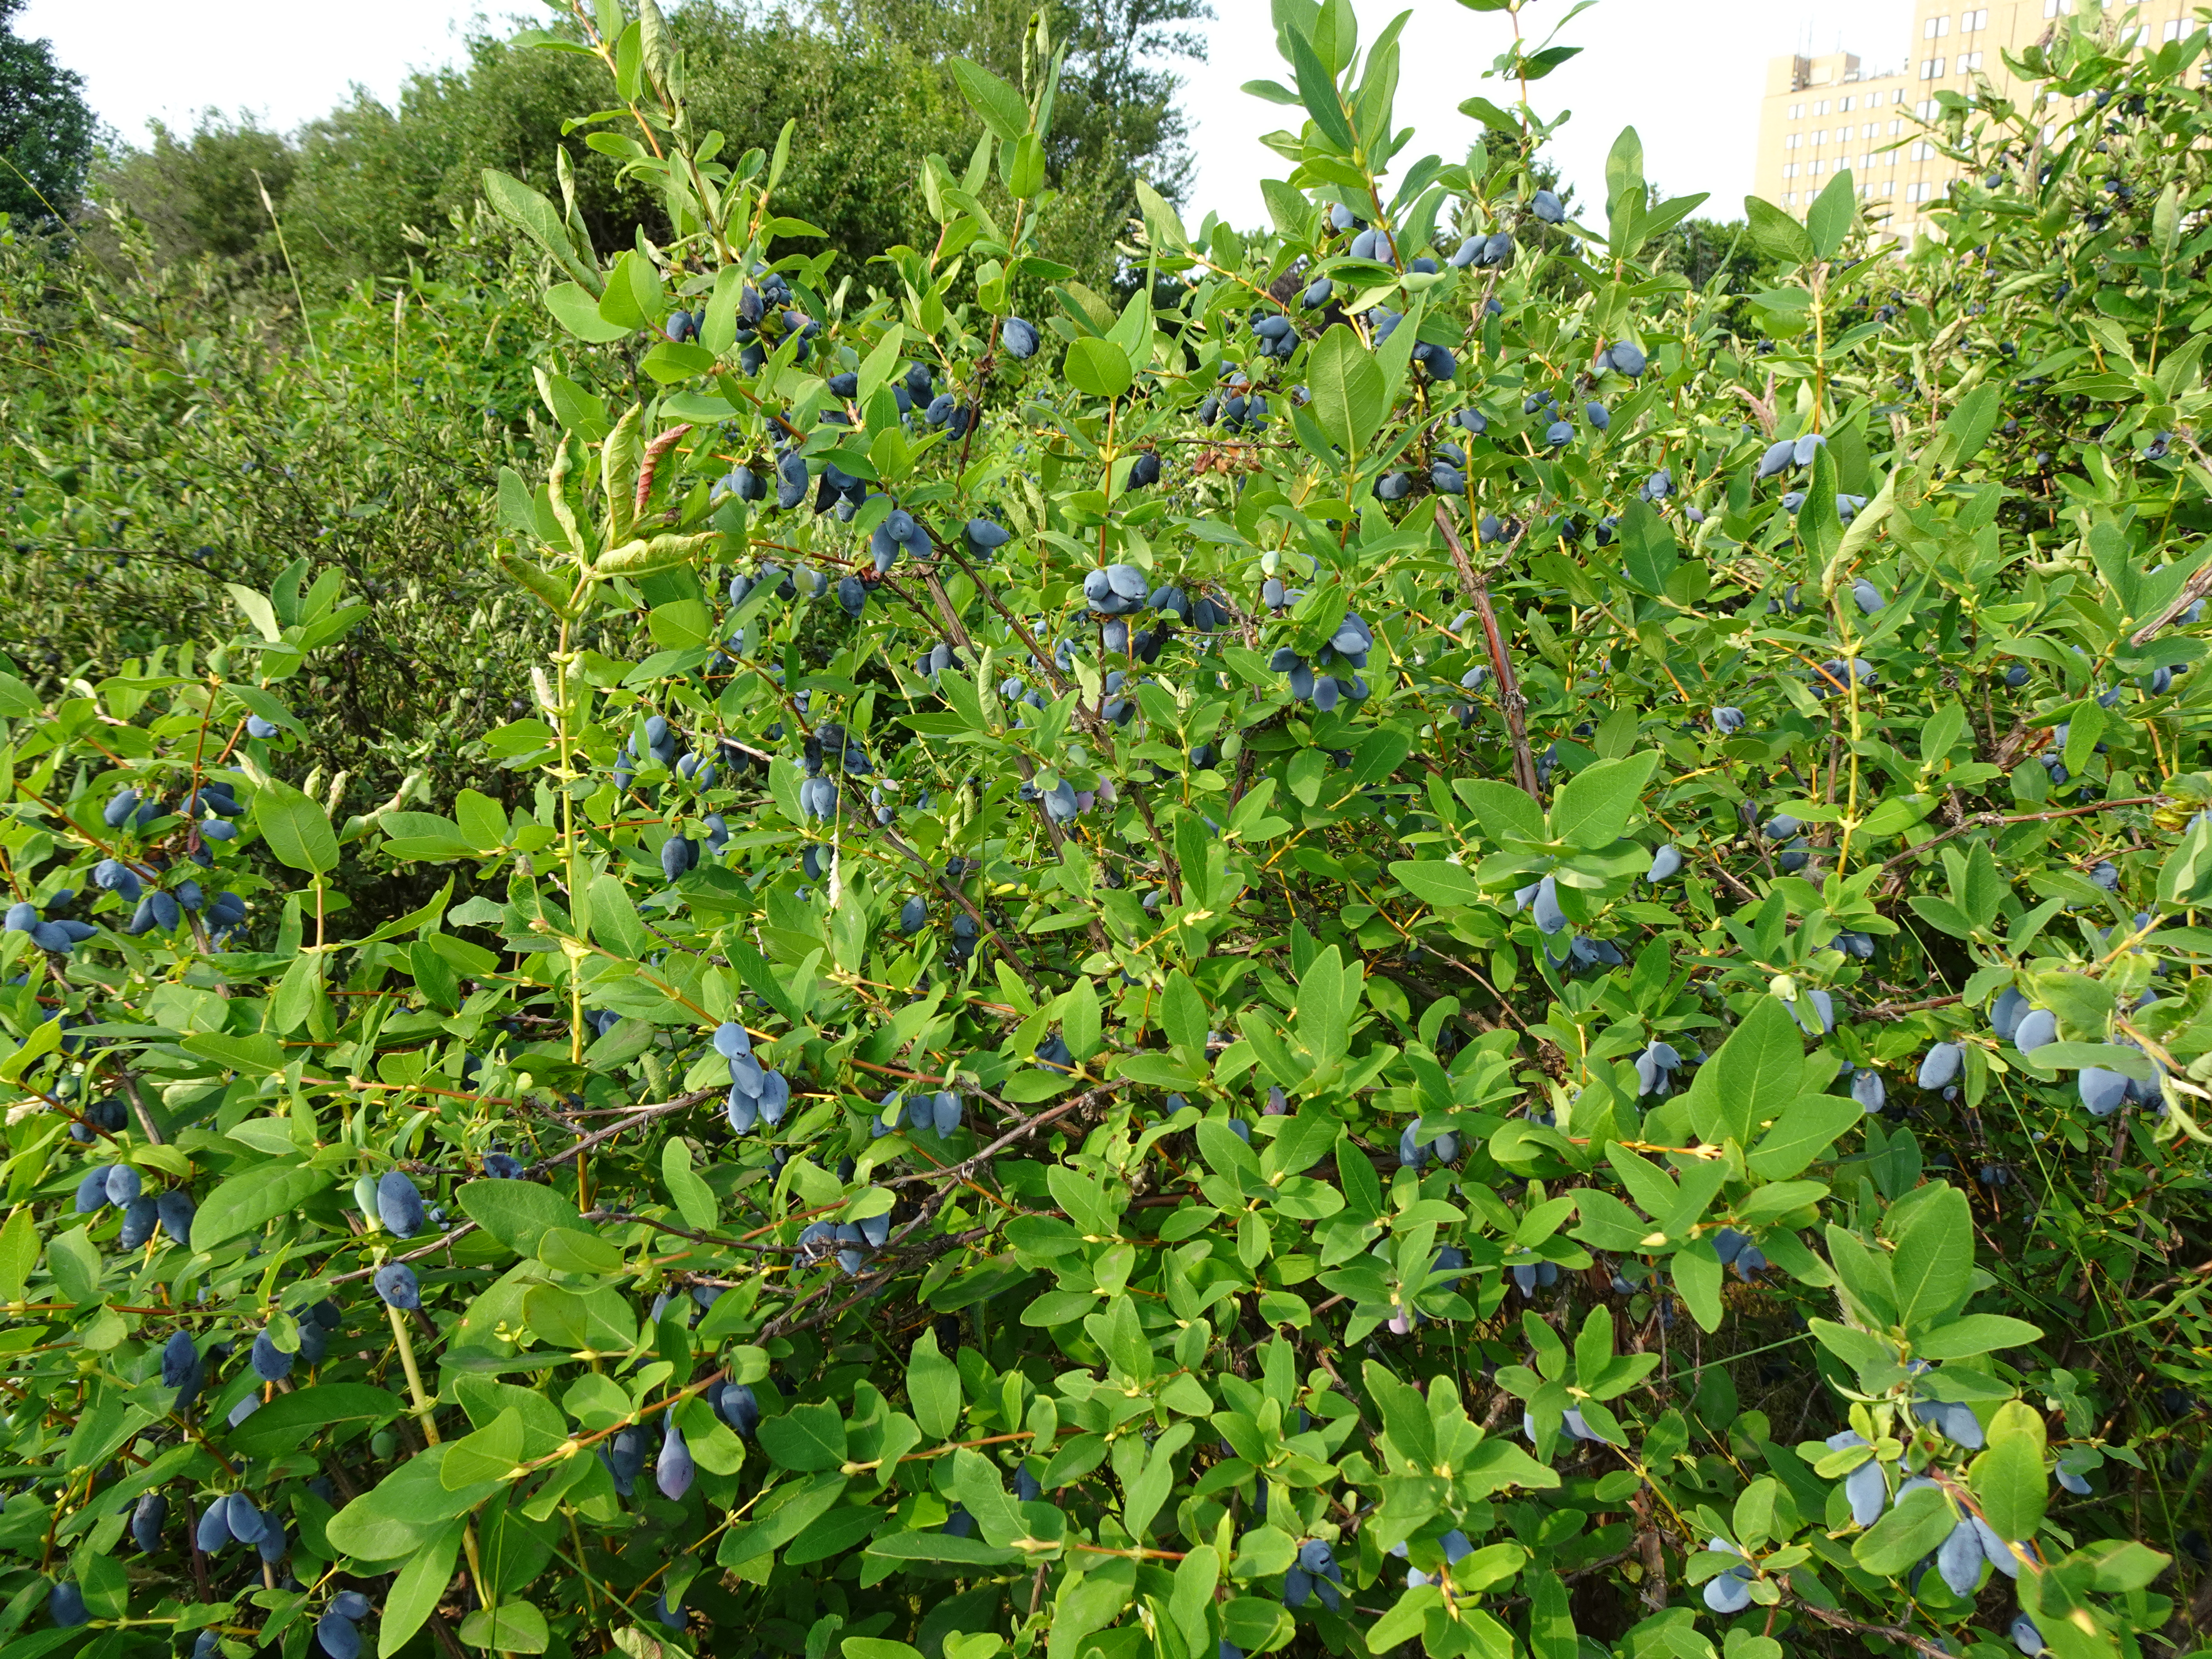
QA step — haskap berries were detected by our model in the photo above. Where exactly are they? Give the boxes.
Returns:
[687,1305,708,1326]
[244,1570,273,1612]
[1543,399,1563,425]
[1536,1257,1556,1286]
[1461,664,1493,689]
[900,896,927,933]
[1287,663,1317,704]
[203,920,219,934]
[1007,678,1022,701]
[248,714,280,741]
[1440,1526,1474,1567]
[63,1080,84,1105]
[861,1211,887,1249]
[1046,780,1082,822]
[373,1262,422,1310]
[51,1580,92,1629]
[1768,973,1796,1002]
[229,766,245,774]
[1194,600,1214,632]
[14,1037,50,1085]
[1224,867,1232,874]
[428,1207,445,1222]
[917,789,929,810]
[1889,1104,1904,1123]
[1448,610,1478,631]
[1236,375,1248,388]
[888,806,893,814]
[877,807,890,825]
[1161,768,1174,780]
[2071,643,2086,657]
[734,329,759,344]
[702,814,728,856]
[774,454,809,509]
[224,1491,279,1540]
[127,861,159,886]
[1483,298,1503,318]
[1563,1406,1609,1447]
[1221,1638,1244,1659]
[802,845,822,881]
[1035,697,1047,708]
[1141,635,1162,665]
[777,444,800,462]
[1360,784,1372,798]
[1015,718,1025,729]
[1248,312,1264,325]
[1225,425,1235,432]
[99,1096,130,1134]
[653,1423,696,1503]
[51,920,98,942]
[1485,593,1505,614]
[638,902,656,911]
[735,316,753,329]
[1147,762,1159,784]
[1432,441,1473,464]
[1548,514,1576,540]
[858,752,874,775]
[1035,789,1044,797]
[793,757,805,768]
[43,889,75,909]
[2150,562,2164,577]
[797,1222,837,1270]
[651,1292,674,1326]
[766,725,773,736]
[1253,776,1268,786]
[1104,564,1148,601]
[948,642,965,672]
[2092,681,2121,708]
[2077,1065,2130,1117]
[1232,425,1242,434]
[1740,799,1757,824]
[767,1159,785,1182]
[1015,1459,1040,1504]
[1224,317,1230,331]
[1238,473,1247,492]
[232,1392,260,1429]
[175,878,204,910]
[2190,598,2209,616]
[15,974,34,986]
[1559,1419,1584,1441]
[1200,408,1214,427]
[220,894,244,914]
[1545,420,1575,448]
[56,1076,77,1101]
[1392,1539,1410,1557]
[1524,1105,1532,1123]
[47,1088,60,1108]
[1575,723,1592,736]
[246,1326,299,1379]
[1020,695,1026,702]
[753,1067,789,1124]
[1449,413,1462,427]
[2011,1616,2039,1657]
[1419,342,1456,381]
[103,1162,143,1207]
[1794,434,1826,466]
[1217,676,1226,683]
[68,1103,97,1144]
[1834,492,1868,516]
[1854,578,1874,597]
[1414,1308,1428,1325]
[755,997,768,1008]
[816,846,830,873]
[739,340,762,376]
[1646,850,1681,883]
[2013,1006,2059,1055]
[2157,1099,2184,1116]
[1420,725,1433,737]
[1341,652,1367,668]
[2185,810,2212,836]
[599,1010,621,1036]
[811,1152,827,1172]
[1851,1068,1885,1115]
[312,1298,342,1330]
[1907,1360,1990,1448]
[1262,1084,1286,1118]
[2067,906,2083,911]
[794,697,807,712]
[1537,757,1554,784]
[2130,946,2143,954]
[1798,991,1834,1037]
[708,1379,726,1420]
[1261,550,1279,576]
[649,730,675,766]
[925,393,956,426]
[1298,1538,1331,1575]
[134,798,164,842]
[825,845,835,854]
[1140,781,1150,788]
[1908,1106,1923,1119]
[1453,406,1487,432]
[1843,658,1878,686]
[1068,745,1087,767]
[1144,891,1159,907]
[522,1144,531,1157]
[1221,392,1248,428]
[764,287,778,315]
[1312,676,1338,713]
[813,725,856,753]
[1112,683,1126,695]
[423,1199,434,1207]
[229,1074,235,1083]
[796,688,811,699]
[1004,625,1011,638]
[119,1196,160,1251]
[2171,662,2188,675]
[1026,654,1033,663]
[1830,674,1849,695]
[205,792,243,817]
[2052,763,2068,785]
[1933,1153,1949,1169]
[945,403,970,440]
[1447,706,1459,719]
[837,1155,854,1182]
[1011,718,1020,726]
[1201,1030,1221,1061]
[605,1204,626,1214]
[855,408,862,420]
[1537,753,1543,762]
[1839,1060,1852,1077]
[1779,837,1810,870]
[1064,637,1077,654]
[2079,787,2095,800]
[1477,514,1500,543]
[1277,328,1300,356]
[1406,258,1440,275]
[181,789,209,818]
[483,1151,523,1181]
[1783,1001,1800,1024]
[1636,1050,1655,1096]
[281,1578,305,1594]
[772,332,812,361]
[1011,315,1039,355]
[1810,660,1842,681]
[598,1445,632,1496]
[1524,1411,1540,1444]
[1373,474,1386,497]
[1434,1131,1458,1163]
[725,1048,766,1095]
[129,897,157,935]
[910,1094,934,1130]
[1023,688,1036,707]
[2104,1043,2167,1100]
[1784,492,1807,515]
[1003,318,1033,359]
[559,1091,585,1120]
[729,574,750,605]
[1604,660,1612,672]
[187,837,215,870]
[1738,1245,1765,1284]
[1472,253,1486,269]
[1461,703,1477,727]
[650,953,665,966]
[711,474,734,500]
[1965,1505,2038,1576]
[1373,314,1405,347]
[852,401,857,409]
[213,932,237,954]
[1512,881,1538,913]
[1572,953,1590,973]
[2141,1093,2164,1110]
[1254,316,1290,339]
[783,311,818,338]
[984,783,993,790]
[1592,350,1618,374]
[1190,742,1218,770]
[1720,706,1748,728]
[374,1171,426,1238]
[983,908,997,929]
[908,382,935,409]
[2054,718,2071,747]
[1241,790,1247,799]
[206,1119,219,1133]
[885,385,915,414]
[1051,638,1065,657]
[722,1080,762,1135]
[2006,668,2033,686]
[1369,306,1397,325]
[1336,672,1370,699]
[1150,456,1160,484]
[772,721,783,740]
[726,637,743,652]
[173,1358,205,1412]
[1765,812,1798,839]
[1037,1038,1071,1075]
[288,1301,311,1327]
[692,310,706,345]
[966,777,974,787]
[836,492,855,524]
[1068,612,1078,622]
[372,1431,396,1460]
[1181,602,1194,627]
[1350,230,1377,259]
[1080,606,1092,619]
[838,576,864,618]
[1334,748,1352,770]
[485,1139,506,1160]
[1841,514,1855,526]
[1427,1245,1463,1294]
[1210,592,1230,625]
[311,1476,333,1509]
[1388,260,1396,267]
[859,569,881,592]
[1218,360,1237,380]
[2087,858,2119,891]
[117,864,141,904]
[257,1510,286,1562]
[657,1597,687,1631]
[1840,925,1874,957]
[1524,386,1553,414]
[91,858,121,889]
[1294,1410,1310,1436]
[771,429,783,443]
[105,790,138,827]
[1293,384,1305,393]
[460,1051,482,1092]
[204,905,245,926]
[1851,586,1887,613]
[128,1491,168,1553]
[2151,903,2160,914]
[2158,959,2166,973]
[1531,190,1566,223]
[1167,1094,1186,1114]
[60,1020,94,1060]
[1249,1477,1271,1514]
[1325,201,1355,233]
[1328,618,1370,655]
[1044,791,1062,823]
[1610,340,1649,376]
[707,652,717,672]
[2132,913,2155,934]
[2154,665,2171,698]
[725,738,748,774]
[1942,1086,1958,1100]
[694,1274,729,1311]
[1373,786,1388,816]
[658,948,667,955]
[1245,410,1251,419]
[1584,400,1610,429]
[1567,961,1576,978]
[720,640,728,646]
[1227,1119,1249,1143]
[912,985,927,1004]
[677,750,703,782]
[1096,774,1118,804]
[1574,1090,1582,1100]
[1122,969,1142,986]
[45,1010,67,1031]
[1099,698,1126,720]
[717,1382,762,1435]
[1586,937,1625,965]
[1544,743,1563,768]
[73,1164,113,1215]
[1222,1439,1238,1456]
[780,412,792,442]
[1998,1165,2009,1185]
[1898,1450,1911,1472]
[930,642,950,678]
[1036,633,1041,639]
[224,922,251,937]
[751,571,763,583]
[887,508,912,540]
[1684,505,1706,525]
[1103,619,1128,652]
[2125,986,2158,1014]
[750,265,787,289]
[1648,472,1667,498]
[1846,1458,1890,1528]
[1166,586,1187,620]
[954,934,986,957]
[940,1504,973,1537]
[901,516,932,560]
[321,1589,375,1618]
[1203,394,1220,422]
[814,775,837,822]
[715,647,728,664]
[760,560,796,602]
[1765,600,1781,614]
[2173,606,2198,630]
[6,977,17,986]
[968,405,981,431]
[967,859,982,870]
[1827,1430,1875,1455]
[1641,484,1652,503]
[1709,1231,1752,1263]
[585,1009,604,1027]
[1808,685,1825,700]
[6,901,36,939]
[1784,584,1805,613]
[712,744,727,764]
[1283,589,1309,606]
[1085,569,1108,599]
[776,287,793,308]
[1682,1032,1709,1064]
[1056,656,1070,672]
[872,786,884,806]
[1712,709,1735,736]
[1937,1515,1982,1596]
[811,468,839,513]
[774,440,786,451]
[1315,640,1333,666]
[967,517,1011,546]
[1345,611,1373,646]
[1531,1114,1542,1126]
[843,477,866,510]
[736,283,766,327]
[2036,754,2057,768]
[681,831,698,869]
[1033,692,1040,699]
[309,1613,366,1659]
[828,461,857,491]
[2009,664,2024,674]
[802,737,822,776]
[159,1329,200,1388]
[771,408,785,429]
[1483,232,1510,263]
[764,416,779,432]
[917,650,932,675]
[34,919,78,953]
[1531,874,1571,936]
[732,467,754,503]
[780,1057,806,1072]
[793,561,815,595]
[873,1091,906,1135]
[154,1189,197,1246]
[1076,790,1094,815]
[1031,654,1039,666]
[1088,590,1130,615]
[663,1400,683,1433]
[1710,1537,1753,1579]
[1331,443,1341,449]
[931,1090,964,1139]
[1114,703,1137,728]
[1156,619,1168,644]
[1266,646,1299,672]
[1497,516,1513,544]
[1429,461,1467,493]
[869,516,906,570]
[1398,1116,1432,1167]
[1204,818,1219,839]
[1019,780,1041,800]
[1448,235,1488,269]
[628,730,639,757]
[1049,849,1057,858]
[1373,1238,1393,1266]
[1000,676,1016,695]
[1038,1038,1058,1058]
[1381,472,1411,500]
[215,782,235,803]
[2094,740,2110,754]
[1283,1562,1310,1608]
[2057,1457,2090,1495]
[1375,231,1398,263]
[805,569,828,596]
[692,754,715,792]
[1260,579,1283,610]
[1652,1063,1668,1094]
[1303,279,1331,310]
[1128,453,1155,490]
[795,888,807,902]
[945,856,966,877]
[1916,1040,1963,1091]
[665,310,692,343]
[1125,630,1150,662]
[2098,927,2113,940]
[441,1223,453,1232]
[1568,934,1600,963]
[1544,944,1566,968]
[1588,660,1603,678]
[1115,599,1145,614]
[493,1015,518,1036]
[393,1007,411,1017]
[853,1266,885,1296]
[2112,1033,2122,1044]
[1064,822,1076,841]
[1812,934,1845,955]
[1260,337,1282,357]
[2142,432,2174,461]
[1612,1277,1630,1295]
[1078,613,1089,627]
[1897,1477,1944,1510]
[1298,552,1323,583]
[610,1423,647,1486]
[1229,372,1244,398]
[145,850,173,875]
[1438,722,1444,730]
[838,346,860,374]
[1648,1041,1683,1069]
[1148,583,1169,611]
[818,408,849,437]
[353,1173,380,1215]
[1510,521,1519,537]
[713,1020,756,1059]
[1298,388,1310,401]
[1034,621,1047,635]
[1141,678,1157,687]
[193,1495,239,1555]
[1980,1164,1994,1184]
[1249,396,1267,431]
[1656,843,1672,859]
[196,1286,208,1302]
[771,663,786,682]
[760,344,768,364]
[295,1319,330,1365]
[953,913,977,937]
[1539,1110,1556,1128]
[150,891,181,936]
[610,750,634,790]
[799,778,817,816]
[838,750,864,775]
[1412,339,1433,361]
[1703,1575,1762,1614]
[752,473,767,500]
[662,838,689,883]
[1224,387,1232,400]
[905,361,931,388]
[457,999,467,1014]
[1104,670,1125,696]
[1917,1638,1949,1659]
[774,1148,789,1165]
[882,778,900,792]
[2135,666,2160,691]
[836,1223,864,1275]
[1515,1257,1536,1298]
[824,372,868,397]
[1621,568,1630,579]
[757,282,772,291]
[850,740,860,750]
[730,629,745,640]
[865,491,899,507]
[1757,439,1796,477]
[1037,611,1044,617]
[1312,1560,1344,1614]
[1408,1566,1440,1592]
[199,818,239,841]
[2034,1131,2045,1141]
[644,716,666,748]
[195,1626,220,1658]
[1663,467,1679,495]
[1394,794,1411,805]
[1390,1306,1409,1336]
[1987,987,2028,1040]
[964,528,993,559]
[1595,517,1618,548]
